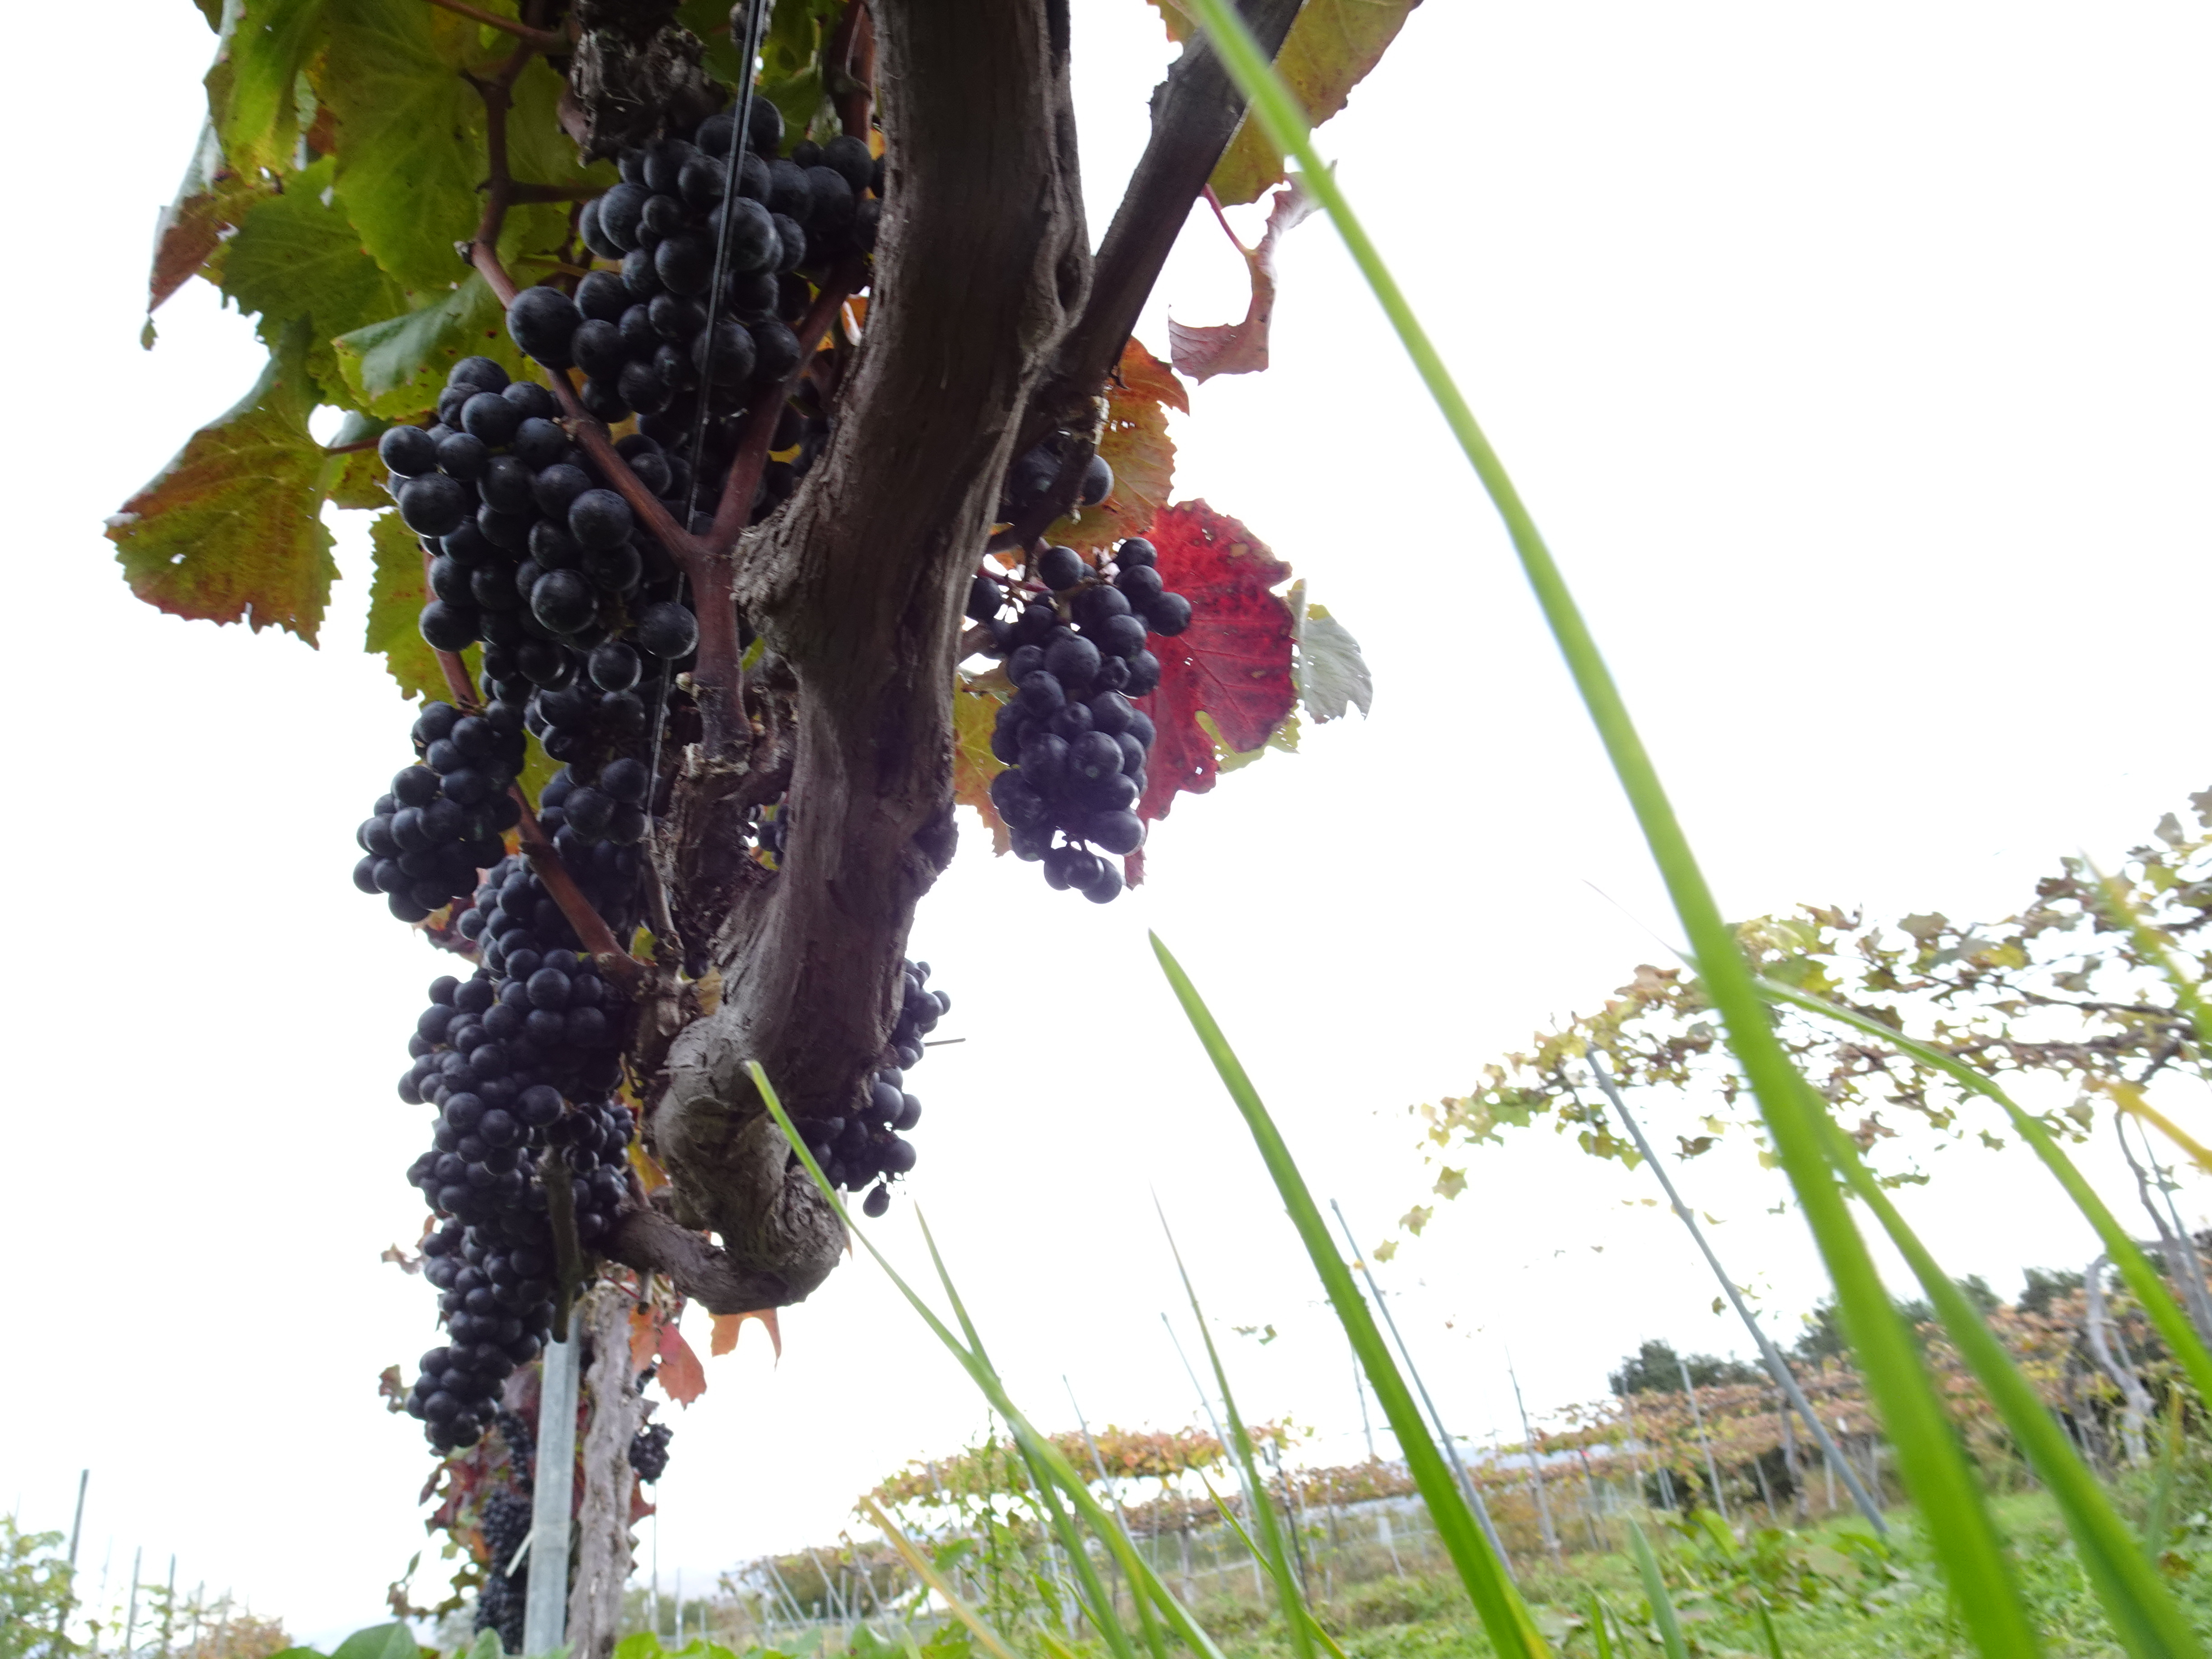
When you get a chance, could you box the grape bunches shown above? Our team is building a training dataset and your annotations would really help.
[884,960,952,1072]
[967,537,1201,898]
[411,1155,624,1279]
[526,1097,638,1173]
[529,683,698,838]
[499,1409,535,1487]
[489,1590,528,1655]
[469,1578,508,1635]
[409,1344,500,1452]
[481,1491,528,1570]
[459,852,637,976]
[371,469,557,711]
[383,357,702,688]
[346,698,532,918]
[630,1426,673,1484]
[422,1219,552,1369]
[1000,435,1111,526]
[791,346,850,474]
[411,951,621,1174]
[812,1070,924,1214]
[635,396,798,523]
[507,96,890,423]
